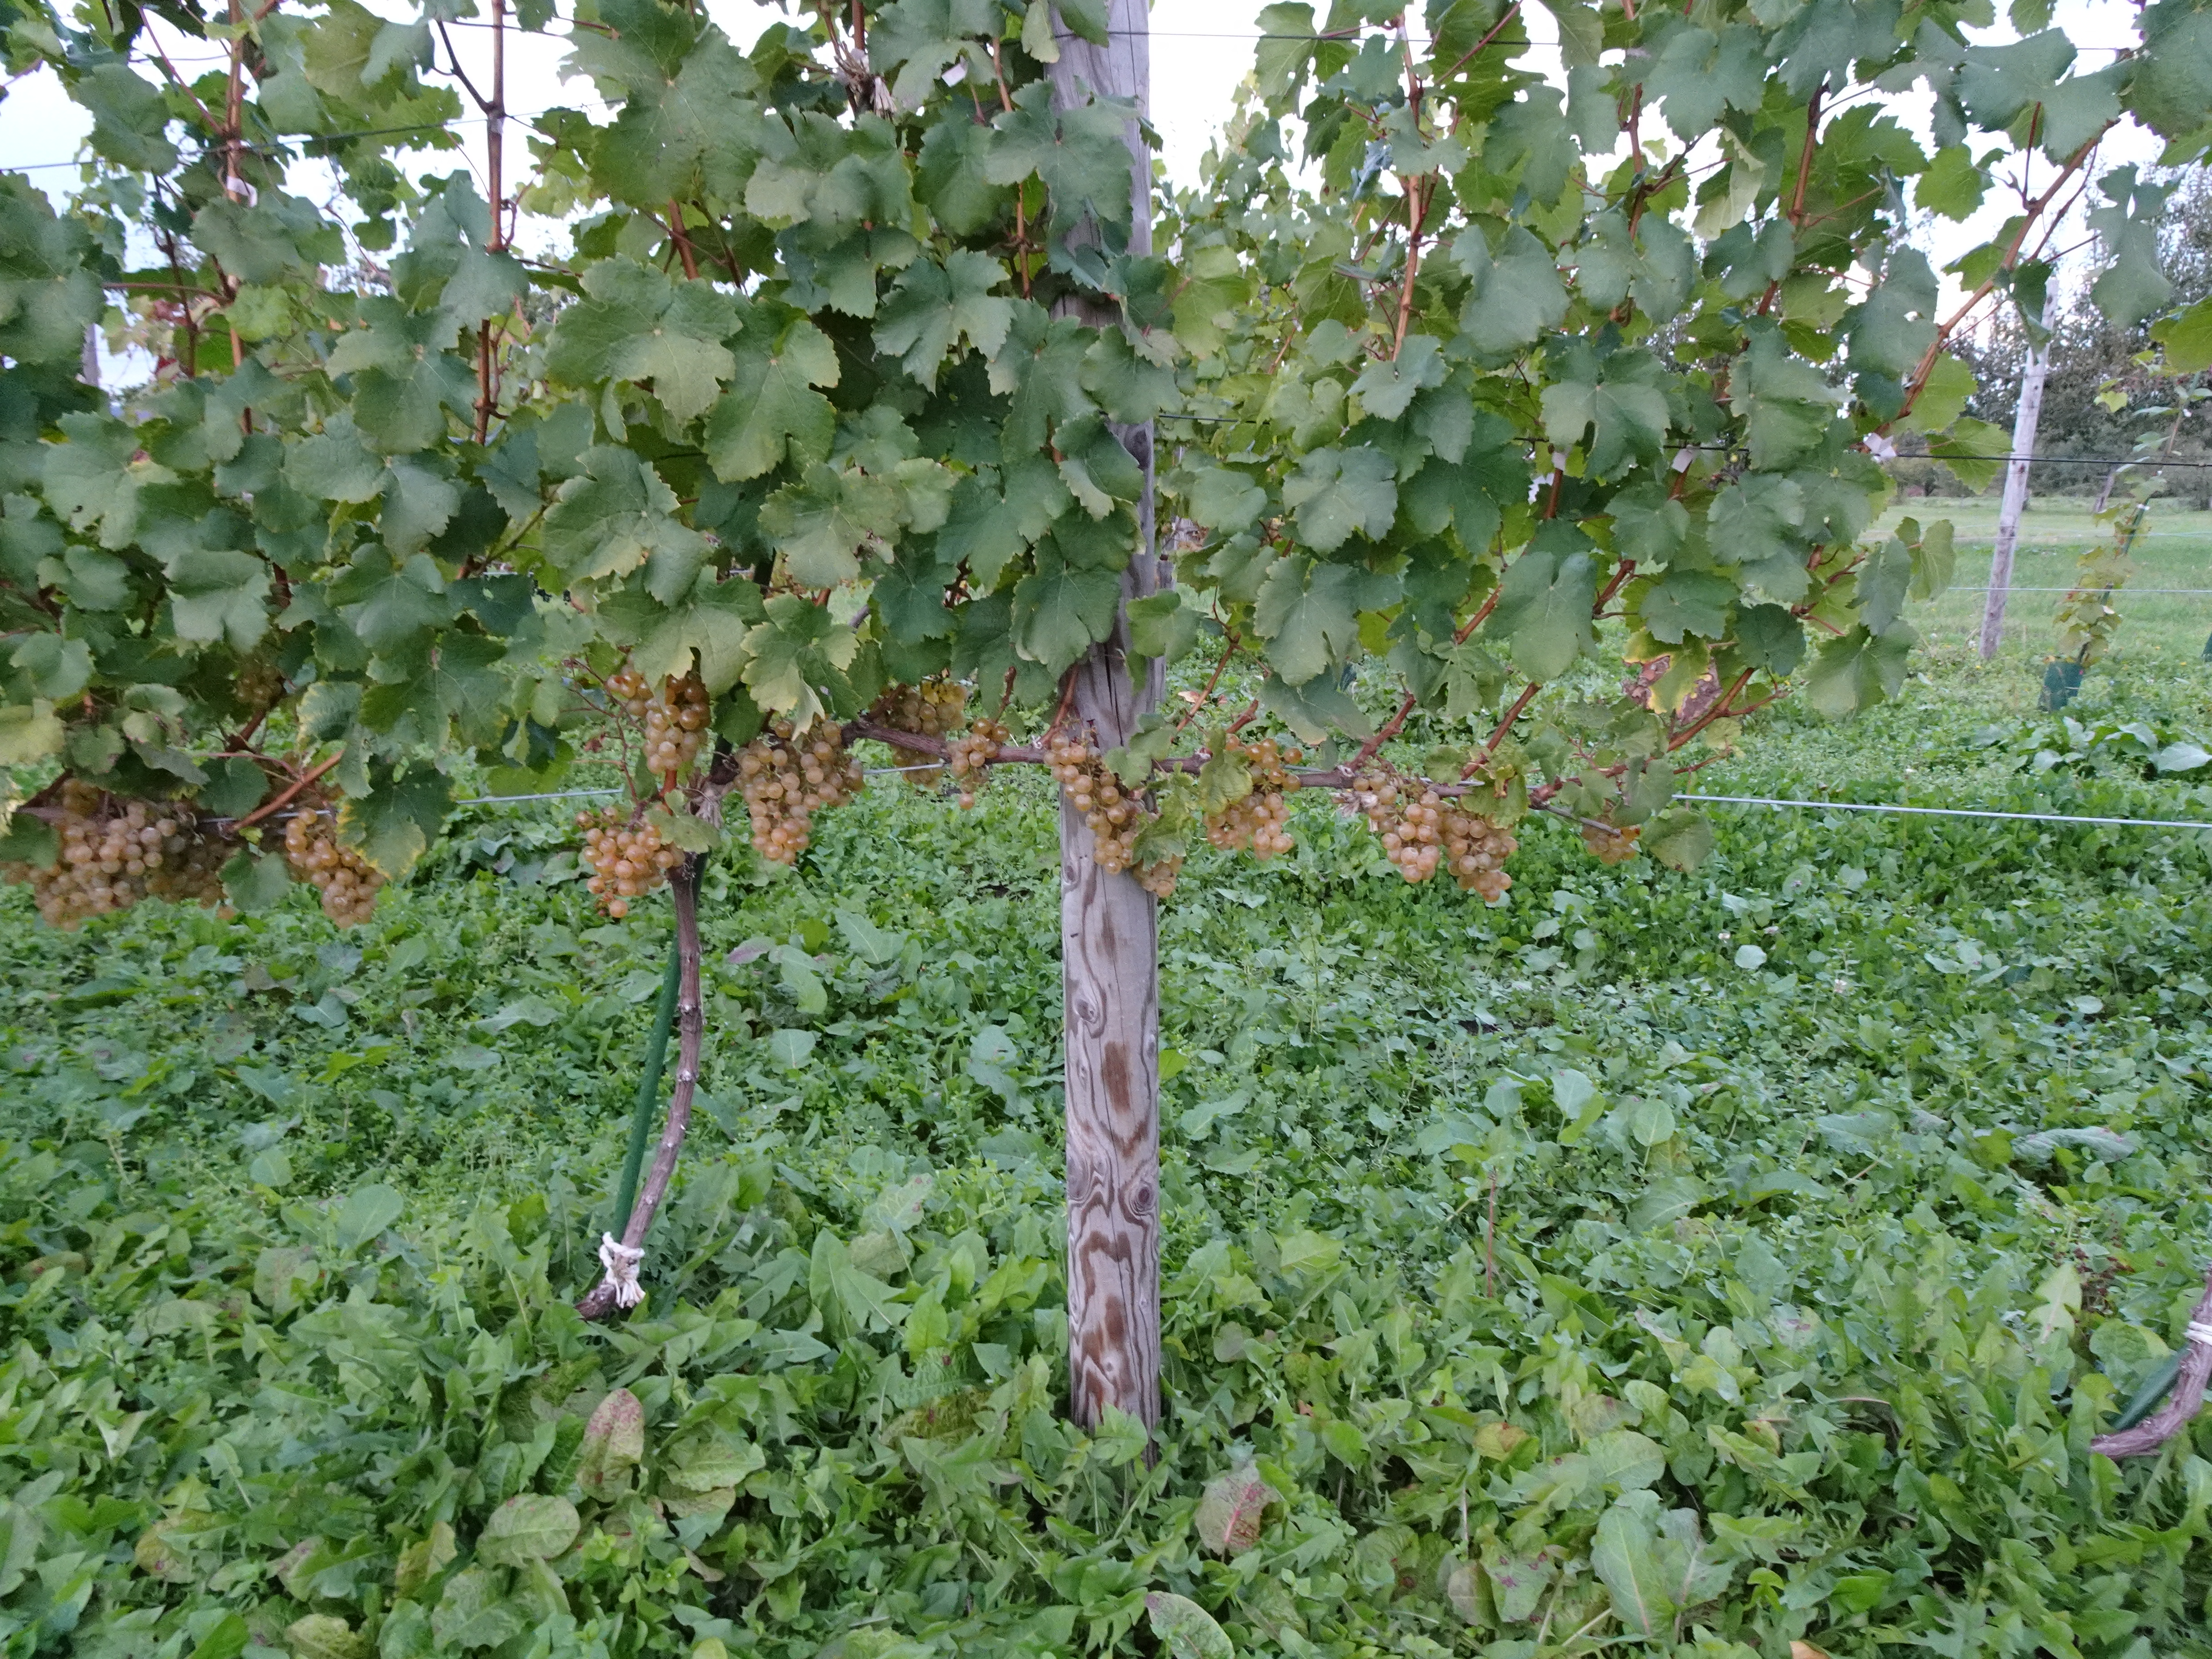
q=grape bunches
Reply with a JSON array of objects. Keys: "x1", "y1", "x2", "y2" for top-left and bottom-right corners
[
  {"x1": 1043, "y1": 730, "x2": 1138, "y2": 874},
  {"x1": 947, "y1": 718, "x2": 1009, "y2": 810},
  {"x1": 1580, "y1": 799, "x2": 1640, "y2": 866},
  {"x1": 735, "y1": 739, "x2": 814, "y2": 866},
  {"x1": 1352, "y1": 770, "x2": 1456, "y2": 883},
  {"x1": 24, "y1": 777, "x2": 198, "y2": 932},
  {"x1": 1203, "y1": 729, "x2": 1258, "y2": 851},
  {"x1": 575, "y1": 803, "x2": 685, "y2": 918},
  {"x1": 233, "y1": 658, "x2": 284, "y2": 710},
  {"x1": 1438, "y1": 811, "x2": 1518, "y2": 902},
  {"x1": 1248, "y1": 732, "x2": 1302, "y2": 861},
  {"x1": 606, "y1": 645, "x2": 710, "y2": 773},
  {"x1": 1132, "y1": 850, "x2": 1182, "y2": 898},
  {"x1": 156, "y1": 843, "x2": 242, "y2": 922},
  {"x1": 0, "y1": 857, "x2": 34, "y2": 885},
  {"x1": 284, "y1": 808, "x2": 388, "y2": 931},
  {"x1": 775, "y1": 713, "x2": 864, "y2": 809},
  {"x1": 889, "y1": 675, "x2": 970, "y2": 789}
]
